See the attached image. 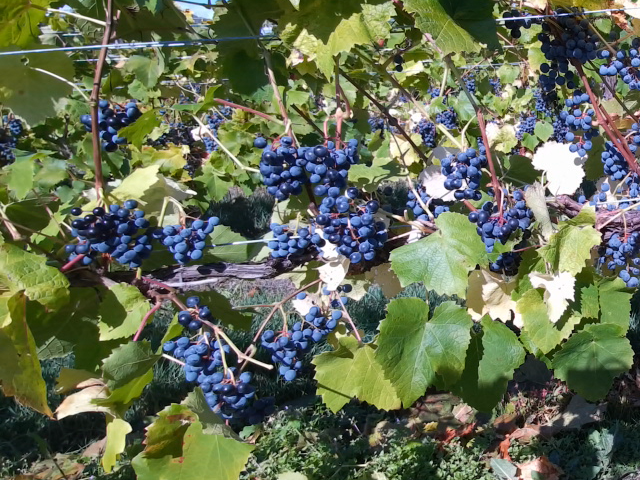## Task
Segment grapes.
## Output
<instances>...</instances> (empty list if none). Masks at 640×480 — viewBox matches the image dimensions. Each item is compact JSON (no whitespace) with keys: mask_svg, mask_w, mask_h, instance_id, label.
<instances>
[{"mask_svg":"<svg viewBox=\"0 0 640 480\" xmlns=\"http://www.w3.org/2000/svg\"><path fill=\"white\" fill-rule=\"evenodd\" d=\"M640 178L639 175L637 173H631L629 176H627L624 179V184L626 186H629V191H628V195H623L620 196L619 199L621 198H627V197H633L639 194L640 192Z\"/></svg>","mask_w":640,"mask_h":480,"instance_id":"grapes-18","label":"grapes"},{"mask_svg":"<svg viewBox=\"0 0 640 480\" xmlns=\"http://www.w3.org/2000/svg\"><path fill=\"white\" fill-rule=\"evenodd\" d=\"M532 22L528 19L505 22V26L510 30V35L513 38H519L521 36V26H524L526 30L531 28Z\"/></svg>","mask_w":640,"mask_h":480,"instance_id":"grapes-19","label":"grapes"},{"mask_svg":"<svg viewBox=\"0 0 640 480\" xmlns=\"http://www.w3.org/2000/svg\"><path fill=\"white\" fill-rule=\"evenodd\" d=\"M322 309L320 307L312 306L308 313L304 315V319L307 322H312L315 328H303V323L298 321L288 330L287 336H279L276 341L274 332L272 330L263 331L262 336L259 338L261 346L266 348L270 353H274L271 356V360L280 364L277 373L282 375L288 383H294L298 378V370L302 368L304 362L298 360L294 364V357L298 353V349L307 350L310 345V340L313 342H319L324 336H327L330 332L336 329L339 321L343 317L341 310H333L330 317L327 319L321 315Z\"/></svg>","mask_w":640,"mask_h":480,"instance_id":"grapes-5","label":"grapes"},{"mask_svg":"<svg viewBox=\"0 0 640 480\" xmlns=\"http://www.w3.org/2000/svg\"><path fill=\"white\" fill-rule=\"evenodd\" d=\"M139 202L136 199H128L124 202V208L120 205H111L109 212L102 207H95L93 214H86L84 219H74L71 222L70 235L78 238V244H66L64 251L69 254L67 259L73 261L79 254H86L79 263L83 266L90 265L100 253H107L117 259L120 264H128L131 269L140 267L144 260L151 257L154 249L152 238L160 241L163 247H168V252L179 264H189L191 260L199 261L203 257V249L206 247V238L216 226L220 224L218 215L210 216L205 222L195 219L190 228L183 229L181 224H167L164 228L150 226V222L144 219L146 212L142 209L134 211L130 217V211L137 209ZM146 229L144 234L136 237V244L129 248L131 237L138 229Z\"/></svg>","mask_w":640,"mask_h":480,"instance_id":"grapes-2","label":"grapes"},{"mask_svg":"<svg viewBox=\"0 0 640 480\" xmlns=\"http://www.w3.org/2000/svg\"><path fill=\"white\" fill-rule=\"evenodd\" d=\"M340 301L343 305H346L349 302V298L347 296H342L340 298ZM340 301L338 299H333L331 301V305L335 308H338L340 306Z\"/></svg>","mask_w":640,"mask_h":480,"instance_id":"grapes-24","label":"grapes"},{"mask_svg":"<svg viewBox=\"0 0 640 480\" xmlns=\"http://www.w3.org/2000/svg\"><path fill=\"white\" fill-rule=\"evenodd\" d=\"M203 334L195 337L196 344L191 345L187 336H180L175 340H165L162 349L172 353L176 358L185 360V380L193 382L201 387L204 392L208 409L213 411L221 400L216 414L226 421H230V427L240 434L245 426L258 424L265 415L275 411V399L266 397L262 401L255 396L256 388L249 385L253 380V374L243 371L238 375L236 366H229L234 377H237L235 385L232 382L223 384L224 372L216 371V367L222 366L221 352L217 340L209 344Z\"/></svg>","mask_w":640,"mask_h":480,"instance_id":"grapes-3","label":"grapes"},{"mask_svg":"<svg viewBox=\"0 0 640 480\" xmlns=\"http://www.w3.org/2000/svg\"><path fill=\"white\" fill-rule=\"evenodd\" d=\"M640 232L635 231L627 236V242L620 240V234L614 232L609 238L607 247L604 249V253L608 256H613L612 260L607 264L609 271H614L617 266L624 267L626 265V254L631 260L633 266H640V258L637 257V253L640 248Z\"/></svg>","mask_w":640,"mask_h":480,"instance_id":"grapes-10","label":"grapes"},{"mask_svg":"<svg viewBox=\"0 0 640 480\" xmlns=\"http://www.w3.org/2000/svg\"><path fill=\"white\" fill-rule=\"evenodd\" d=\"M610 189V184L608 182H602L600 184V193L599 194H595L593 196V201H589L588 205L589 206H593L596 207L597 206V202L598 201H605L606 200V192Z\"/></svg>","mask_w":640,"mask_h":480,"instance_id":"grapes-22","label":"grapes"},{"mask_svg":"<svg viewBox=\"0 0 640 480\" xmlns=\"http://www.w3.org/2000/svg\"><path fill=\"white\" fill-rule=\"evenodd\" d=\"M123 111L124 113L110 109L108 100L98 102V135L100 140L105 141L102 149L106 152H115L118 144H127V138L118 137L117 130L126 128L142 116V110L134 102H127Z\"/></svg>","mask_w":640,"mask_h":480,"instance_id":"grapes-8","label":"grapes"},{"mask_svg":"<svg viewBox=\"0 0 640 480\" xmlns=\"http://www.w3.org/2000/svg\"><path fill=\"white\" fill-rule=\"evenodd\" d=\"M200 317L202 320L210 319L213 315V312L210 310V307L207 304H203L199 307Z\"/></svg>","mask_w":640,"mask_h":480,"instance_id":"grapes-23","label":"grapes"},{"mask_svg":"<svg viewBox=\"0 0 640 480\" xmlns=\"http://www.w3.org/2000/svg\"><path fill=\"white\" fill-rule=\"evenodd\" d=\"M427 188L423 183L418 184V188L416 189V195L421 200L423 204H427L428 201H431L432 205H436L433 209V217L437 218L439 214H444L450 212V207L453 206V201H443L441 199H435L429 196L427 193Z\"/></svg>","mask_w":640,"mask_h":480,"instance_id":"grapes-14","label":"grapes"},{"mask_svg":"<svg viewBox=\"0 0 640 480\" xmlns=\"http://www.w3.org/2000/svg\"><path fill=\"white\" fill-rule=\"evenodd\" d=\"M178 323L182 327H187L190 330H198L203 326V322L191 314L189 311H179L178 312Z\"/></svg>","mask_w":640,"mask_h":480,"instance_id":"grapes-15","label":"grapes"},{"mask_svg":"<svg viewBox=\"0 0 640 480\" xmlns=\"http://www.w3.org/2000/svg\"><path fill=\"white\" fill-rule=\"evenodd\" d=\"M640 47V37L634 38L631 41V48L628 51L629 64L632 67H640V55L638 52V48Z\"/></svg>","mask_w":640,"mask_h":480,"instance_id":"grapes-21","label":"grapes"},{"mask_svg":"<svg viewBox=\"0 0 640 480\" xmlns=\"http://www.w3.org/2000/svg\"><path fill=\"white\" fill-rule=\"evenodd\" d=\"M522 261V256L517 252L503 251L496 259L489 264V269L496 274H502L504 269L505 274L507 276H514L518 273L520 269V263Z\"/></svg>","mask_w":640,"mask_h":480,"instance_id":"grapes-13","label":"grapes"},{"mask_svg":"<svg viewBox=\"0 0 640 480\" xmlns=\"http://www.w3.org/2000/svg\"><path fill=\"white\" fill-rule=\"evenodd\" d=\"M512 198L515 200L512 209L502 213V219L506 223L500 222L498 217L493 219L489 217L498 212V206L491 201L484 202L479 211L474 210L468 214V221L478 225L476 233L482 236L488 253L493 251L496 242L504 244L510 238L512 231L518 228L523 231L522 240L516 242L513 248L522 251L528 244L527 239L531 236L530 219L534 217V213L528 208V202L521 191L514 190Z\"/></svg>","mask_w":640,"mask_h":480,"instance_id":"grapes-6","label":"grapes"},{"mask_svg":"<svg viewBox=\"0 0 640 480\" xmlns=\"http://www.w3.org/2000/svg\"><path fill=\"white\" fill-rule=\"evenodd\" d=\"M594 115L595 112L593 109H587L585 111V115L582 117V111L578 108H574L572 110V114L566 110H562L559 113V119L564 121L567 125H571V129L573 131H578L581 128L584 131L583 138L585 140L583 142L579 141L575 144H571L568 147V151L570 153H577L579 157H584L588 151L593 148V142L590 139L600 135V131L598 129H591V124L593 123L592 117Z\"/></svg>","mask_w":640,"mask_h":480,"instance_id":"grapes-9","label":"grapes"},{"mask_svg":"<svg viewBox=\"0 0 640 480\" xmlns=\"http://www.w3.org/2000/svg\"><path fill=\"white\" fill-rule=\"evenodd\" d=\"M556 22L560 27H567L569 31L560 33L561 39H551L542 32L537 34L538 40L542 43L539 51L552 61L551 69L547 63H541L539 70L542 73H548V76L542 75L540 81L542 89L548 92L553 89L556 84L562 85L567 80H571L574 76L572 70H568L567 58H577L581 64H585L587 60H593L596 57L599 60H608L611 53L608 50L597 49L596 45L600 41V37L591 32L588 28L586 20L578 21L575 17H557Z\"/></svg>","mask_w":640,"mask_h":480,"instance_id":"grapes-4","label":"grapes"},{"mask_svg":"<svg viewBox=\"0 0 640 480\" xmlns=\"http://www.w3.org/2000/svg\"><path fill=\"white\" fill-rule=\"evenodd\" d=\"M407 199L408 201L406 202V207L408 209H412V214L414 215V218L415 219L421 218L424 222H428L429 216L425 213V211L422 209L419 203L416 202V196L413 195L412 191H409L407 193Z\"/></svg>","mask_w":640,"mask_h":480,"instance_id":"grapes-16","label":"grapes"},{"mask_svg":"<svg viewBox=\"0 0 640 480\" xmlns=\"http://www.w3.org/2000/svg\"><path fill=\"white\" fill-rule=\"evenodd\" d=\"M639 275V267H632L630 269V272L628 270H620L618 272L619 278L625 283L627 287H637L639 285V279L636 276Z\"/></svg>","mask_w":640,"mask_h":480,"instance_id":"grapes-17","label":"grapes"},{"mask_svg":"<svg viewBox=\"0 0 640 480\" xmlns=\"http://www.w3.org/2000/svg\"><path fill=\"white\" fill-rule=\"evenodd\" d=\"M253 146L263 149L260 154L259 174L266 186V193L275 196L277 202H283L291 196H297L302 191L303 167L309 173L308 180L312 184L323 185L314 187V195L322 197L317 205L316 223L325 225L323 237L316 231L301 227L297 231V238H292L294 230L288 224H269L272 236L276 242H268L272 258H279L293 253H306L313 250L318 256L324 254L326 240L334 246V251L343 257H349L351 263H361L362 260L374 262L377 249L386 247L388 233L381 231L385 228L383 221H374V215L379 210L376 201H369L358 207V212H351L349 217L334 218L333 208L339 213H346L350 209V199H356L359 190L349 187L346 194L340 190L347 186L351 165L359 161L358 141L349 139L346 147L338 149L334 141L316 143L313 146L293 147L290 137H282L275 148L267 145L265 137H255Z\"/></svg>","mask_w":640,"mask_h":480,"instance_id":"grapes-1","label":"grapes"},{"mask_svg":"<svg viewBox=\"0 0 640 480\" xmlns=\"http://www.w3.org/2000/svg\"><path fill=\"white\" fill-rule=\"evenodd\" d=\"M626 58V52L624 50H618L616 52V59L609 63H601L597 71L601 76H614L617 73L623 77V82L628 85L630 90L640 91V69L635 71V75L630 73V69L623 63Z\"/></svg>","mask_w":640,"mask_h":480,"instance_id":"grapes-12","label":"grapes"},{"mask_svg":"<svg viewBox=\"0 0 640 480\" xmlns=\"http://www.w3.org/2000/svg\"><path fill=\"white\" fill-rule=\"evenodd\" d=\"M572 99H567L565 105L567 107L580 106L581 104H588L590 97L587 93H583L580 90H574L571 93Z\"/></svg>","mask_w":640,"mask_h":480,"instance_id":"grapes-20","label":"grapes"},{"mask_svg":"<svg viewBox=\"0 0 640 480\" xmlns=\"http://www.w3.org/2000/svg\"><path fill=\"white\" fill-rule=\"evenodd\" d=\"M604 149L606 151L600 153L603 173L612 181L622 180L630 172V166L611 141L604 143Z\"/></svg>","mask_w":640,"mask_h":480,"instance_id":"grapes-11","label":"grapes"},{"mask_svg":"<svg viewBox=\"0 0 640 480\" xmlns=\"http://www.w3.org/2000/svg\"><path fill=\"white\" fill-rule=\"evenodd\" d=\"M476 144L477 150L467 148L440 160V173L445 178L444 187L454 191L455 200L466 198L479 201L482 198L481 192L476 189L481 183L482 168L488 167V160L481 136L476 138Z\"/></svg>","mask_w":640,"mask_h":480,"instance_id":"grapes-7","label":"grapes"}]
</instances>
